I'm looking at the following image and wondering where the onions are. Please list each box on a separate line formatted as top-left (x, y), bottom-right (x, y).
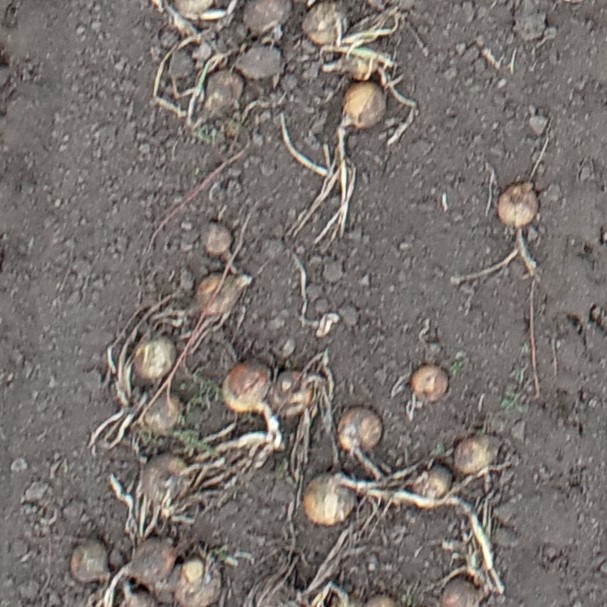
top-left (408, 364), bottom-right (446, 400)
top-left (366, 591), bottom-right (398, 607)
top-left (236, 44), bottom-right (282, 80)
top-left (440, 574), bottom-right (484, 606)
top-left (335, 407), bottom-right (383, 451)
top-left (173, 557), bottom-right (219, 605)
top-left (347, 48), bottom-right (376, 80)
top-left (127, 540), bottom-right (180, 578)
top-left (197, 271), bottom-right (242, 320)
top-left (340, 85), bottom-right (386, 129)
top-left (121, 591), bottom-right (157, 607)
top-left (272, 371), bottom-right (311, 412)
top-left (495, 185), bottom-right (538, 226)
top-left (301, 474), bottom-right (350, 526)
top-left (172, 0), bottom-right (212, 16)
top-left (204, 68), bottom-right (243, 105)
top-left (417, 463), bottom-right (450, 499)
top-left (220, 359), bottom-right (272, 410)
top-left (453, 434), bottom-right (491, 474)
top-left (145, 391), bottom-right (182, 430)
top-left (202, 221), bottom-right (232, 257)
top-left (132, 339), bottom-right (174, 382)
top-left (306, 7), bottom-right (339, 46)
top-left (140, 454), bottom-right (187, 503)
top-left (247, 0), bottom-right (290, 36)
top-left (69, 540), bottom-right (111, 581)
